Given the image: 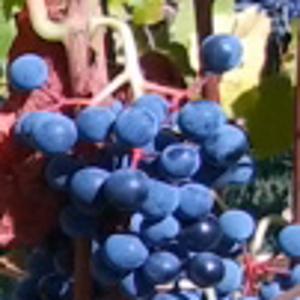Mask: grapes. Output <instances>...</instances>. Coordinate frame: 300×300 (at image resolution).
<instances>
[{
	"instance_id": "grapes-4",
	"label": "grapes",
	"mask_w": 300,
	"mask_h": 300,
	"mask_svg": "<svg viewBox=\"0 0 300 300\" xmlns=\"http://www.w3.org/2000/svg\"><path fill=\"white\" fill-rule=\"evenodd\" d=\"M5 74L14 88L28 92L44 90L49 83L48 65L34 53H24L10 59L5 66Z\"/></svg>"
},
{
	"instance_id": "grapes-3",
	"label": "grapes",
	"mask_w": 300,
	"mask_h": 300,
	"mask_svg": "<svg viewBox=\"0 0 300 300\" xmlns=\"http://www.w3.org/2000/svg\"><path fill=\"white\" fill-rule=\"evenodd\" d=\"M204 55L203 71L210 75H228L245 60V45L233 33L211 34L198 45Z\"/></svg>"
},
{
	"instance_id": "grapes-1",
	"label": "grapes",
	"mask_w": 300,
	"mask_h": 300,
	"mask_svg": "<svg viewBox=\"0 0 300 300\" xmlns=\"http://www.w3.org/2000/svg\"><path fill=\"white\" fill-rule=\"evenodd\" d=\"M12 139L43 153L49 190L67 193L63 232L95 240L94 284L129 300H272L300 284V226L277 232L280 254L249 249L255 212L218 215L211 191L246 185L255 160L224 103L198 99L177 110L160 95L130 106L17 115Z\"/></svg>"
},
{
	"instance_id": "grapes-2",
	"label": "grapes",
	"mask_w": 300,
	"mask_h": 300,
	"mask_svg": "<svg viewBox=\"0 0 300 300\" xmlns=\"http://www.w3.org/2000/svg\"><path fill=\"white\" fill-rule=\"evenodd\" d=\"M73 268L72 248L57 245L51 251L34 248L23 259L22 278L16 289L20 300H29L35 292L42 295H61L70 287V273Z\"/></svg>"
}]
</instances>
